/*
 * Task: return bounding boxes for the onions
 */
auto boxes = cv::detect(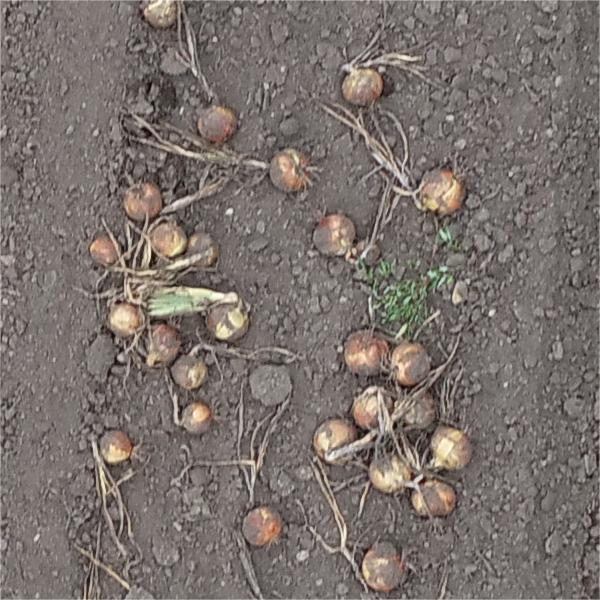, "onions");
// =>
[417,167,464,212]
[141,322,180,363]
[398,392,434,426]
[343,331,385,373]
[238,504,282,548]
[429,427,472,469]
[343,67,382,104]
[98,429,133,464]
[142,0,175,29]
[148,220,184,257]
[313,213,352,255]
[88,230,120,266]
[411,479,454,515]
[180,399,214,430]
[122,181,160,220]
[207,304,247,342]
[370,452,412,491]
[183,231,217,267]
[358,541,405,589]
[352,388,388,425]
[313,417,356,458]
[388,342,427,384]
[269,149,312,190]
[170,353,205,388]
[194,104,236,144]
[107,300,143,336]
